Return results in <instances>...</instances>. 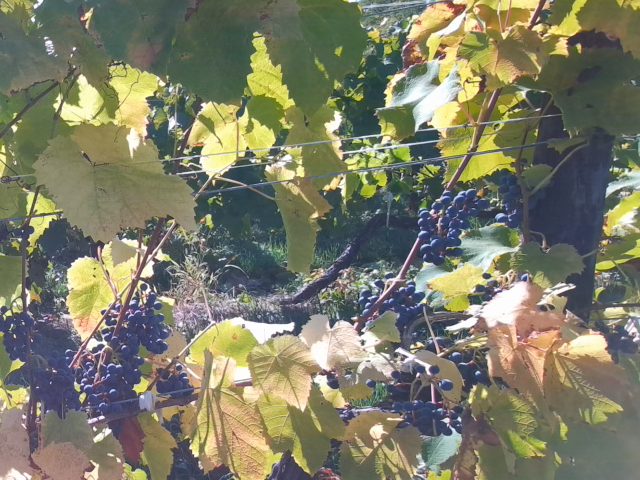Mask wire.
<instances>
[{"instance_id":"obj_1","label":"wire","mask_w":640,"mask_h":480,"mask_svg":"<svg viewBox=\"0 0 640 480\" xmlns=\"http://www.w3.org/2000/svg\"><path fill=\"white\" fill-rule=\"evenodd\" d=\"M549 143H550L549 139H539L529 143H518V144H513L509 146H504V147L476 150V151H471L463 154H451V155L440 156V157L421 158L417 160L401 161L396 164L362 166L360 168H356L352 170L326 171L323 173L309 174L306 176V179L311 180V179L325 178L329 176L354 175V174L362 173L365 171H372V170L398 169L404 166L420 165L423 163L442 162V161H448L453 159H465V158L474 157L478 155L506 152V151H512V150L521 149V148H535L537 145L549 144Z\"/></svg>"},{"instance_id":"obj_2","label":"wire","mask_w":640,"mask_h":480,"mask_svg":"<svg viewBox=\"0 0 640 480\" xmlns=\"http://www.w3.org/2000/svg\"><path fill=\"white\" fill-rule=\"evenodd\" d=\"M381 136H382L381 132H374V133H368V134H353V135H348V136H344V137H332V138H326V139H320V140L305 141V142L292 143V144H283V145H276V146L252 147V148H246V149L234 150V151H227V152H211V153H202V154L176 155V156H172V157H162L161 161L162 162H175V161L186 160V159H204V158H214V157H229V156L243 155V154H249V153H254V152H267V151H278V150H285V149H294V148H301V147H307V146H316V145L335 143V142H346V141L356 140V139L377 138V137H381Z\"/></svg>"},{"instance_id":"obj_3","label":"wire","mask_w":640,"mask_h":480,"mask_svg":"<svg viewBox=\"0 0 640 480\" xmlns=\"http://www.w3.org/2000/svg\"><path fill=\"white\" fill-rule=\"evenodd\" d=\"M561 112H549V113H538V114H530L529 116L522 117H506L496 120H477L469 123L463 124H443V125H435V126H425L418 129L419 133L427 132V131H438L445 129H465L472 128L479 125H498L508 122H524L531 121L533 119L540 118H551V117H561Z\"/></svg>"},{"instance_id":"obj_4","label":"wire","mask_w":640,"mask_h":480,"mask_svg":"<svg viewBox=\"0 0 640 480\" xmlns=\"http://www.w3.org/2000/svg\"><path fill=\"white\" fill-rule=\"evenodd\" d=\"M474 138H475L474 134L454 135V136H447L443 138L426 139L424 141H419V142H407L402 144H386V145L371 146V147H364V148H348V149H344L342 151V154L347 155L350 153H367V152L381 151V150H388V149H405L409 147H421V146H426L428 144H438V143H445V142L457 141V140H469Z\"/></svg>"},{"instance_id":"obj_5","label":"wire","mask_w":640,"mask_h":480,"mask_svg":"<svg viewBox=\"0 0 640 480\" xmlns=\"http://www.w3.org/2000/svg\"><path fill=\"white\" fill-rule=\"evenodd\" d=\"M291 181H292L291 177L255 181V182H252V183L240 184V185H236V186H225V187H221V188L203 189V190H200V191H195L193 193V196L197 197V196H202V195H205V194L223 193V192H227V191H238V190H242V189L254 188V187H257V186L272 185V184H279V183H289Z\"/></svg>"},{"instance_id":"obj_6","label":"wire","mask_w":640,"mask_h":480,"mask_svg":"<svg viewBox=\"0 0 640 480\" xmlns=\"http://www.w3.org/2000/svg\"><path fill=\"white\" fill-rule=\"evenodd\" d=\"M293 162H294V158L290 157L285 159H276V160L262 161L257 163L232 165L231 169L232 170L251 169V168H259V167L271 166V165L287 164V163H293Z\"/></svg>"},{"instance_id":"obj_7","label":"wire","mask_w":640,"mask_h":480,"mask_svg":"<svg viewBox=\"0 0 640 480\" xmlns=\"http://www.w3.org/2000/svg\"><path fill=\"white\" fill-rule=\"evenodd\" d=\"M200 390H201L200 386H188V387L178 388V389H174V390H170V391L156 392L155 396L156 397L172 396V395H177V394H180V393L191 392V391H200Z\"/></svg>"},{"instance_id":"obj_8","label":"wire","mask_w":640,"mask_h":480,"mask_svg":"<svg viewBox=\"0 0 640 480\" xmlns=\"http://www.w3.org/2000/svg\"><path fill=\"white\" fill-rule=\"evenodd\" d=\"M522 132H523L522 128H515L511 130H504V131L480 132L479 136L480 137H496V136L513 135V134L522 133Z\"/></svg>"},{"instance_id":"obj_9","label":"wire","mask_w":640,"mask_h":480,"mask_svg":"<svg viewBox=\"0 0 640 480\" xmlns=\"http://www.w3.org/2000/svg\"><path fill=\"white\" fill-rule=\"evenodd\" d=\"M218 171L217 167L213 168H205V169H193L189 171H176V176H192L196 174H207V173H215Z\"/></svg>"},{"instance_id":"obj_10","label":"wire","mask_w":640,"mask_h":480,"mask_svg":"<svg viewBox=\"0 0 640 480\" xmlns=\"http://www.w3.org/2000/svg\"><path fill=\"white\" fill-rule=\"evenodd\" d=\"M33 177L32 173H27L24 175H17L14 174L13 176H3L0 175V181H20V180H27Z\"/></svg>"},{"instance_id":"obj_11","label":"wire","mask_w":640,"mask_h":480,"mask_svg":"<svg viewBox=\"0 0 640 480\" xmlns=\"http://www.w3.org/2000/svg\"><path fill=\"white\" fill-rule=\"evenodd\" d=\"M139 400H140L139 396H135V397H132L130 399H116V400H112L110 402V405L111 406H115V405H118V404H132V403L137 402Z\"/></svg>"},{"instance_id":"obj_12","label":"wire","mask_w":640,"mask_h":480,"mask_svg":"<svg viewBox=\"0 0 640 480\" xmlns=\"http://www.w3.org/2000/svg\"><path fill=\"white\" fill-rule=\"evenodd\" d=\"M27 217H28L27 213L16 214L14 216H9V217H2V218H0V223L16 221L18 219H24V218H27Z\"/></svg>"}]
</instances>
